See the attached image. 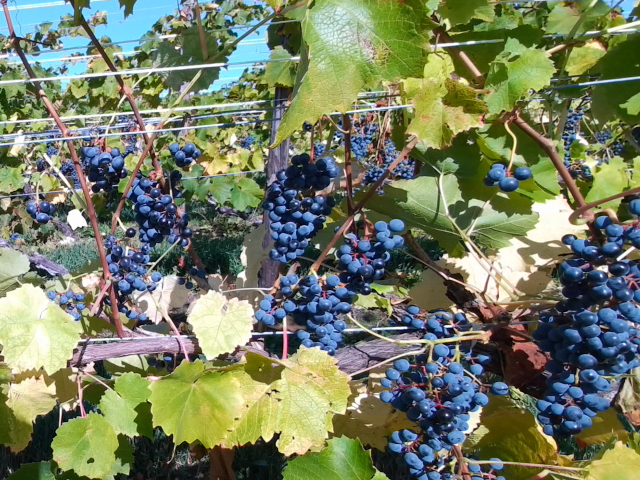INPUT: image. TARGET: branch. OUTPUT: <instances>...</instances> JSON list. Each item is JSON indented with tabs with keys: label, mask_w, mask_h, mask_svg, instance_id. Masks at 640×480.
Masks as SVG:
<instances>
[{
	"label": "branch",
	"mask_w": 640,
	"mask_h": 480,
	"mask_svg": "<svg viewBox=\"0 0 640 480\" xmlns=\"http://www.w3.org/2000/svg\"><path fill=\"white\" fill-rule=\"evenodd\" d=\"M343 126L345 127V155H346V163H347V176H346V192L348 199V208L349 215L345 218V220L341 223L336 234L333 235L325 244V246L321 249L319 255L315 259L312 266L309 268L308 273L310 275H314L316 271L319 269V266L327 256L329 250L332 246L339 240L341 234L343 233L346 226L349 224V231L351 234L355 233V217L361 211L363 205L370 199L372 194L378 190V188L386 181V179L391 174L392 170L401 162L403 158L407 156V154L411 151V149L416 145L417 139L413 138L412 141L407 145L404 151L398 155V157L389 165L385 173L379 179V181L370 188V190L365 194L359 203L357 204L355 210L353 206V197H352V189H351V178H352V160L350 153V137L352 136V123L349 115L344 113L343 115Z\"/></svg>",
	"instance_id": "1"
},
{
	"label": "branch",
	"mask_w": 640,
	"mask_h": 480,
	"mask_svg": "<svg viewBox=\"0 0 640 480\" xmlns=\"http://www.w3.org/2000/svg\"><path fill=\"white\" fill-rule=\"evenodd\" d=\"M67 146H68V150L69 153L71 154V157L75 163L76 169H77V175H78V184H79V188H80V192L82 194L83 200L86 202V205L88 207V216H89V220L91 223V229L93 230V234H94V239H95V243L97 245V252L99 255V259L101 262V266H102V272L104 275V280L105 283L107 285V289H108V293H109V297H110V309L113 315V322H114V326L116 328V335L117 336H123L124 335V328L123 325L121 323L120 320V313L117 307V295H116V291H115V286H114V282L111 278V273H110V269H109V263L107 260V256L105 253V249H104V243L101 237V232H100V226L98 225V221H97V217L95 214V205L93 203L92 198L89 195V192L87 190V186H86V182H85V172H84V166L83 163L79 157V154L76 152V147L74 144V141L72 142H66Z\"/></svg>",
	"instance_id": "2"
},
{
	"label": "branch",
	"mask_w": 640,
	"mask_h": 480,
	"mask_svg": "<svg viewBox=\"0 0 640 480\" xmlns=\"http://www.w3.org/2000/svg\"><path fill=\"white\" fill-rule=\"evenodd\" d=\"M156 137H157V134H151V135L143 134L142 135V138L144 139L146 146H145L144 150L141 152V154L138 157V159L136 160V164L133 167V170L131 172V175L128 178V181L126 182L125 188L123 189V191L121 193V197L118 200V205L115 208V212L113 214V220H112V222L110 224V233L111 234L115 233V226L118 223V217H119L120 211H121V209L123 207V202L126 199V195L128 194V192L130 190V187H131V185H132V183H133V181H134V179H135V177L137 175V172H138L140 166L142 165V161L145 158V156L147 155V153H149L152 166L154 168V171L156 172L157 179L159 181L160 190L162 192H165L167 190V183H166V179H165V176H164V172H163V170H162V168H161V166L159 164L158 157H157V154H156V151H155V148H154V144H153L154 139Z\"/></svg>",
	"instance_id": "3"
},
{
	"label": "branch",
	"mask_w": 640,
	"mask_h": 480,
	"mask_svg": "<svg viewBox=\"0 0 640 480\" xmlns=\"http://www.w3.org/2000/svg\"><path fill=\"white\" fill-rule=\"evenodd\" d=\"M509 117L518 128H520L525 133H527L536 143H538L548 152V154L556 164V167L560 171L561 175L564 177L569 190L572 192V194L576 198L577 204L579 206H582L584 204V198L580 193V191L577 189L576 185L574 184L572 176L566 169L559 155L556 153L551 142L548 139L541 136L535 129L530 127V125L519 114L515 113L514 111H511L509 113Z\"/></svg>",
	"instance_id": "4"
},
{
	"label": "branch",
	"mask_w": 640,
	"mask_h": 480,
	"mask_svg": "<svg viewBox=\"0 0 640 480\" xmlns=\"http://www.w3.org/2000/svg\"><path fill=\"white\" fill-rule=\"evenodd\" d=\"M347 318L351 321V323L355 327L359 328L361 332L367 335H370L372 337L381 338L384 341L394 343L397 346H407L411 344L428 345V344H440V343H451V342H475V343H481V344L487 345L491 335L495 332V328L490 327L486 332L481 334H476L475 336L471 335V336H465V337H449V338H438V339L419 338V339H409V340H398V339H394L392 337L386 336L384 334L371 331L363 327L351 313L347 314Z\"/></svg>",
	"instance_id": "5"
},
{
	"label": "branch",
	"mask_w": 640,
	"mask_h": 480,
	"mask_svg": "<svg viewBox=\"0 0 640 480\" xmlns=\"http://www.w3.org/2000/svg\"><path fill=\"white\" fill-rule=\"evenodd\" d=\"M0 9L1 12L3 14L8 32L10 34V36L12 37V42L14 45V48L18 54L19 59L21 60V63L23 64V66L26 68L28 75L32 78L35 79L37 77V74L34 70V67L32 66V64L29 62L28 58L25 55V52L23 50V47L20 43L19 40V35L17 34V31L15 30L14 27V23L12 21V17L11 14L8 10L7 7V0H0Z\"/></svg>",
	"instance_id": "6"
},
{
	"label": "branch",
	"mask_w": 640,
	"mask_h": 480,
	"mask_svg": "<svg viewBox=\"0 0 640 480\" xmlns=\"http://www.w3.org/2000/svg\"><path fill=\"white\" fill-rule=\"evenodd\" d=\"M78 22L80 27L82 28V30L84 31L86 37L89 39V41L92 43V46L96 49V51L99 53V55L101 56V58L105 61V63L107 64L108 68L110 69L111 72L113 71H117V67L114 64V61L111 59V57L107 54V52L105 51V49L102 47V45L99 43V41L97 40V38L95 37V35L92 33L90 27L88 26V24L86 23L85 20V16L83 14H80L78 16Z\"/></svg>",
	"instance_id": "7"
},
{
	"label": "branch",
	"mask_w": 640,
	"mask_h": 480,
	"mask_svg": "<svg viewBox=\"0 0 640 480\" xmlns=\"http://www.w3.org/2000/svg\"><path fill=\"white\" fill-rule=\"evenodd\" d=\"M278 16H279V12L275 11L272 15H269V16L265 17L264 19L260 20L255 25L251 26L248 30H245L233 42H231V43L227 44L226 46L222 47L221 49H219L215 54H213L209 58V62H214L219 56L224 54L226 51L230 50L231 48L235 47L237 44L242 42L252 32H254L255 30L259 29L261 26H263L264 24L268 23L269 21L276 19Z\"/></svg>",
	"instance_id": "8"
},
{
	"label": "branch",
	"mask_w": 640,
	"mask_h": 480,
	"mask_svg": "<svg viewBox=\"0 0 640 480\" xmlns=\"http://www.w3.org/2000/svg\"><path fill=\"white\" fill-rule=\"evenodd\" d=\"M115 80L117 81V83L123 88L128 104L133 112V115L135 117V119L138 122L139 128L140 129H147L146 126V122L144 120V118L142 117V114L140 113L139 107L137 106V103L135 101V98L133 96L131 87L128 85V83L122 78V76H115Z\"/></svg>",
	"instance_id": "9"
},
{
	"label": "branch",
	"mask_w": 640,
	"mask_h": 480,
	"mask_svg": "<svg viewBox=\"0 0 640 480\" xmlns=\"http://www.w3.org/2000/svg\"><path fill=\"white\" fill-rule=\"evenodd\" d=\"M34 89L37 96L42 100L44 108L50 113L55 122L58 124L60 132L64 136H67L69 134L67 126L59 113L51 106L50 99L42 90L41 84H34Z\"/></svg>",
	"instance_id": "10"
},
{
	"label": "branch",
	"mask_w": 640,
	"mask_h": 480,
	"mask_svg": "<svg viewBox=\"0 0 640 480\" xmlns=\"http://www.w3.org/2000/svg\"><path fill=\"white\" fill-rule=\"evenodd\" d=\"M203 72H204V69L200 68L197 71V74L187 83V85L183 89V91L174 99V101L171 103V105L169 106L167 111L163 114V116L161 117L160 121L157 123L156 129H161L162 128V126L165 124L166 119L173 112L174 108L187 95V93L190 91L191 87L201 78Z\"/></svg>",
	"instance_id": "11"
},
{
	"label": "branch",
	"mask_w": 640,
	"mask_h": 480,
	"mask_svg": "<svg viewBox=\"0 0 640 480\" xmlns=\"http://www.w3.org/2000/svg\"><path fill=\"white\" fill-rule=\"evenodd\" d=\"M582 217L583 220L586 221L587 223V227L593 232V234L596 236V240L599 243H602L605 240V235L602 233V231L599 228H596L592 222L595 219V214L591 209L588 210H584L582 212Z\"/></svg>",
	"instance_id": "12"
},
{
	"label": "branch",
	"mask_w": 640,
	"mask_h": 480,
	"mask_svg": "<svg viewBox=\"0 0 640 480\" xmlns=\"http://www.w3.org/2000/svg\"><path fill=\"white\" fill-rule=\"evenodd\" d=\"M452 51L455 55L459 56L461 60L467 65L468 69L475 78H480L482 76V73L478 71L474 63L458 46L452 47Z\"/></svg>",
	"instance_id": "13"
},
{
	"label": "branch",
	"mask_w": 640,
	"mask_h": 480,
	"mask_svg": "<svg viewBox=\"0 0 640 480\" xmlns=\"http://www.w3.org/2000/svg\"><path fill=\"white\" fill-rule=\"evenodd\" d=\"M188 252L192 256V258H193L195 264L197 265V267L199 269H202L204 267V262L201 260V258L199 256V254L197 253V251L193 247H190L188 249Z\"/></svg>",
	"instance_id": "14"
}]
</instances>
